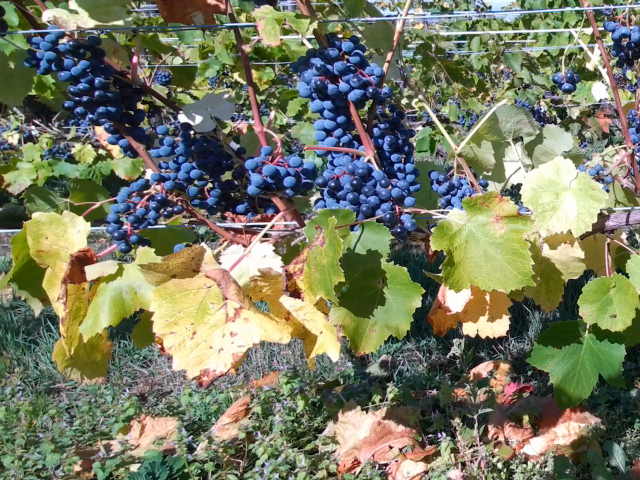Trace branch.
<instances>
[{"mask_svg": "<svg viewBox=\"0 0 640 480\" xmlns=\"http://www.w3.org/2000/svg\"><path fill=\"white\" fill-rule=\"evenodd\" d=\"M404 26H405V20L404 19H400L398 21V23L396 24L395 28H394L393 50L390 49V52L387 53V56H386V58L384 60L383 70L385 71V74H384V76L381 77V83L379 85V88H382L383 82L387 77L388 70L391 67L393 55H394V52L396 50V46L399 43L400 34L402 33Z\"/></svg>", "mask_w": 640, "mask_h": 480, "instance_id": "branch-9", "label": "branch"}, {"mask_svg": "<svg viewBox=\"0 0 640 480\" xmlns=\"http://www.w3.org/2000/svg\"><path fill=\"white\" fill-rule=\"evenodd\" d=\"M114 125L116 126V128L119 130L120 134L123 136V138L132 146V148L140 153V156L142 157L143 161L146 163V165L152 169V171L155 174H159L161 172V169L159 168V166L157 164H155L152 159L149 157V155L147 154V151L145 149V147L143 145H140L127 131L126 127L122 124V122L119 119H116L114 121Z\"/></svg>", "mask_w": 640, "mask_h": 480, "instance_id": "branch-8", "label": "branch"}, {"mask_svg": "<svg viewBox=\"0 0 640 480\" xmlns=\"http://www.w3.org/2000/svg\"><path fill=\"white\" fill-rule=\"evenodd\" d=\"M349 109H350V115L351 118L353 120L354 125L357 128V132L359 134V137L362 140L363 145L365 146L366 149V156L367 157H372L374 159V161H377V157H376V152L374 150V147L372 145V137H371V130H372V123L374 122V116L377 110V104L375 103V101H372L371 107H368V112H367V126H366V130H364L363 128V124L361 122V120L359 119V115L357 113V110L355 109V106L353 103L349 104Z\"/></svg>", "mask_w": 640, "mask_h": 480, "instance_id": "branch-4", "label": "branch"}, {"mask_svg": "<svg viewBox=\"0 0 640 480\" xmlns=\"http://www.w3.org/2000/svg\"><path fill=\"white\" fill-rule=\"evenodd\" d=\"M296 5L305 17H315L317 11L313 8L310 0H296Z\"/></svg>", "mask_w": 640, "mask_h": 480, "instance_id": "branch-10", "label": "branch"}, {"mask_svg": "<svg viewBox=\"0 0 640 480\" xmlns=\"http://www.w3.org/2000/svg\"><path fill=\"white\" fill-rule=\"evenodd\" d=\"M403 81L406 82L408 85H410L415 91L417 96L419 97L421 103L423 104V106L425 107L427 113L429 114V117L432 119V121L435 123L436 127L439 129V131L441 132V134L444 136V138L451 144L453 151L455 152L454 157L459 161V163L461 164V166L464 168L465 172H466V176L469 178V180L471 181V183L473 184V186L476 188L477 192L480 194L484 193V190L482 189V187L478 184L477 180L475 179V177L473 176L470 167L467 165V163L465 162V160L462 157V153L460 152V149L457 146V143L455 142V140L446 132V130L444 129V127L442 126V124L440 123L439 119L437 118V116L434 114L431 106L429 105V103L426 101L420 87L418 85H416L411 79H409L408 77H404Z\"/></svg>", "mask_w": 640, "mask_h": 480, "instance_id": "branch-3", "label": "branch"}, {"mask_svg": "<svg viewBox=\"0 0 640 480\" xmlns=\"http://www.w3.org/2000/svg\"><path fill=\"white\" fill-rule=\"evenodd\" d=\"M267 196L271 197L272 201L274 202L276 207L281 211L286 221H290L294 219L298 227L300 228L305 227V221L301 218L300 215L297 214V212L292 207L293 206L292 198H286L285 196H282L280 198V196L274 190L268 191Z\"/></svg>", "mask_w": 640, "mask_h": 480, "instance_id": "branch-7", "label": "branch"}, {"mask_svg": "<svg viewBox=\"0 0 640 480\" xmlns=\"http://www.w3.org/2000/svg\"><path fill=\"white\" fill-rule=\"evenodd\" d=\"M586 14V18L590 20L591 22V26L594 32V38L595 41L597 42V47L600 49L601 53H602V58L603 61L606 65L607 68V73H608V78L609 81L612 85V90H613V95L615 96V101L617 103V109H618V114H619V118L621 120V122L623 123V127H624V138H625V143H626V151L630 157V162H631V167H632V172L633 175L635 177V182H636V193L640 194V174L637 170V165H636V159H635V154L631 148V141H630V136H629V124L627 119L625 118L624 112H623V107H622V100L620 98V94L618 92V88H617V83L616 80L614 79L613 76V71H612V65L610 63V60L608 58L607 55V51L603 45V42L601 41V38L599 36V30H598V26L596 23V19H595V12H585Z\"/></svg>", "mask_w": 640, "mask_h": 480, "instance_id": "branch-1", "label": "branch"}, {"mask_svg": "<svg viewBox=\"0 0 640 480\" xmlns=\"http://www.w3.org/2000/svg\"><path fill=\"white\" fill-rule=\"evenodd\" d=\"M116 75L118 77H122V78L127 79L128 81L133 83L135 86H137L141 91H143V92L149 94L150 96H152L153 98L163 102L167 107H169L175 113L180 114L182 112V109L178 105H176L174 102H172L167 96H165L162 93L154 90L152 87L144 84L142 81H140L138 78H136L135 76L130 74L128 71L118 70L116 72Z\"/></svg>", "mask_w": 640, "mask_h": 480, "instance_id": "branch-6", "label": "branch"}, {"mask_svg": "<svg viewBox=\"0 0 640 480\" xmlns=\"http://www.w3.org/2000/svg\"><path fill=\"white\" fill-rule=\"evenodd\" d=\"M227 15H228V17H229L231 22H236L235 14H234V12L232 10V3L231 2L227 3Z\"/></svg>", "mask_w": 640, "mask_h": 480, "instance_id": "branch-13", "label": "branch"}, {"mask_svg": "<svg viewBox=\"0 0 640 480\" xmlns=\"http://www.w3.org/2000/svg\"><path fill=\"white\" fill-rule=\"evenodd\" d=\"M15 6L23 14L24 18L31 27H33L34 29L42 28V25L33 19L30 11L20 1H17L15 3Z\"/></svg>", "mask_w": 640, "mask_h": 480, "instance_id": "branch-11", "label": "branch"}, {"mask_svg": "<svg viewBox=\"0 0 640 480\" xmlns=\"http://www.w3.org/2000/svg\"><path fill=\"white\" fill-rule=\"evenodd\" d=\"M176 203L178 205H181L193 218H195L196 220H198V221H200L202 223H205L206 226L209 228V230L211 232H213L214 234H218V235L230 240L231 242H235V243L241 244L244 247H249L251 245V242L249 240H247L246 238L234 235V234L224 230L221 227H217L208 217H206L203 214H200L195 209H193L185 199L178 198L176 200Z\"/></svg>", "mask_w": 640, "mask_h": 480, "instance_id": "branch-5", "label": "branch"}, {"mask_svg": "<svg viewBox=\"0 0 640 480\" xmlns=\"http://www.w3.org/2000/svg\"><path fill=\"white\" fill-rule=\"evenodd\" d=\"M233 33L236 37L238 47L240 49L241 59L243 61V70L246 74L247 84L249 85V102L252 110V114L254 117V124L257 131V137L261 146H268L269 141L267 140V132L264 126V122L260 116L259 112V103L257 100L256 89L254 88L253 72L251 69V61L246 50L245 45L242 42L241 34L237 27L233 28Z\"/></svg>", "mask_w": 640, "mask_h": 480, "instance_id": "branch-2", "label": "branch"}, {"mask_svg": "<svg viewBox=\"0 0 640 480\" xmlns=\"http://www.w3.org/2000/svg\"><path fill=\"white\" fill-rule=\"evenodd\" d=\"M312 34H313L314 38L316 39V42H317L319 48H329L330 47V41L328 39H326L325 35H319L317 30H313Z\"/></svg>", "mask_w": 640, "mask_h": 480, "instance_id": "branch-12", "label": "branch"}]
</instances>
